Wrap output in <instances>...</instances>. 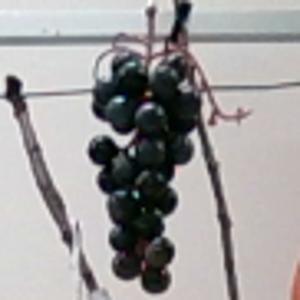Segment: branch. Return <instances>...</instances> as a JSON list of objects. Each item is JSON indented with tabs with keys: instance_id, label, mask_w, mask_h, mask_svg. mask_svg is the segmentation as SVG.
<instances>
[{
	"instance_id": "1",
	"label": "branch",
	"mask_w": 300,
	"mask_h": 300,
	"mask_svg": "<svg viewBox=\"0 0 300 300\" xmlns=\"http://www.w3.org/2000/svg\"><path fill=\"white\" fill-rule=\"evenodd\" d=\"M5 82V98L11 107L12 116L17 120V130L28 161V175L44 201L52 226L72 257L84 292L90 300H112L109 288L100 284L99 276L92 264L79 250L77 238L66 211V203L47 171L45 158L37 141V134L29 121L26 96L23 94V82L17 74L7 75Z\"/></svg>"
},
{
	"instance_id": "2",
	"label": "branch",
	"mask_w": 300,
	"mask_h": 300,
	"mask_svg": "<svg viewBox=\"0 0 300 300\" xmlns=\"http://www.w3.org/2000/svg\"><path fill=\"white\" fill-rule=\"evenodd\" d=\"M202 121L198 130V140L204 163H206L207 175L210 176V185L216 205V217L219 224V239L222 248L223 266L226 273V287L228 300L240 299L238 276L235 273L234 243L232 240L233 221L229 214L228 203L221 182L219 170L220 162L215 159L213 146L209 140V132L201 111Z\"/></svg>"
},
{
	"instance_id": "3",
	"label": "branch",
	"mask_w": 300,
	"mask_h": 300,
	"mask_svg": "<svg viewBox=\"0 0 300 300\" xmlns=\"http://www.w3.org/2000/svg\"><path fill=\"white\" fill-rule=\"evenodd\" d=\"M191 0H173L171 11L173 22L166 36V45L176 54L190 58L188 52V26L190 23Z\"/></svg>"
}]
</instances>
